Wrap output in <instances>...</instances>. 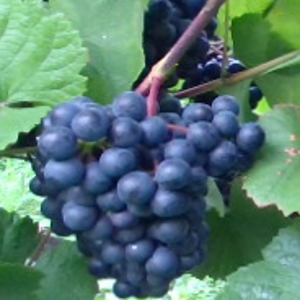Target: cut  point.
<instances>
[{"instance_id": "1", "label": "cut point", "mask_w": 300, "mask_h": 300, "mask_svg": "<svg viewBox=\"0 0 300 300\" xmlns=\"http://www.w3.org/2000/svg\"><path fill=\"white\" fill-rule=\"evenodd\" d=\"M163 83L157 78L154 81L151 90L149 91V95L147 97V107L146 113L148 116L154 115V112L157 109V96L160 94Z\"/></svg>"}]
</instances>
